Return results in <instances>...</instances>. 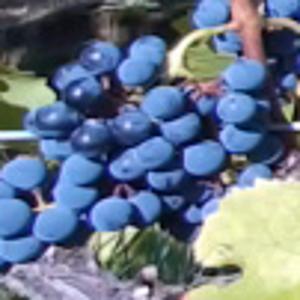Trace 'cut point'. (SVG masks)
Returning a JSON list of instances; mask_svg holds the SVG:
<instances>
[{
  "label": "cut point",
  "instance_id": "1",
  "mask_svg": "<svg viewBox=\"0 0 300 300\" xmlns=\"http://www.w3.org/2000/svg\"><path fill=\"white\" fill-rule=\"evenodd\" d=\"M238 23L236 21H225L222 23L214 24L206 29H198L183 35L174 50H171L165 59V72L168 75L181 74L183 72V58L181 57L189 43L202 38H211L215 35L236 30Z\"/></svg>",
  "mask_w": 300,
  "mask_h": 300
}]
</instances>
